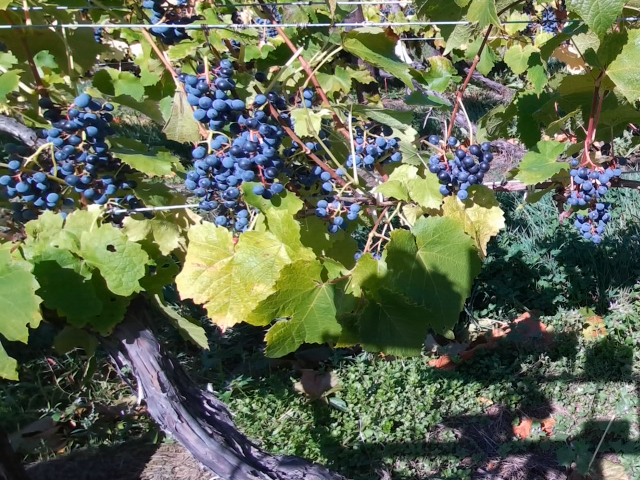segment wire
<instances>
[{
  "label": "wire",
  "mask_w": 640,
  "mask_h": 480,
  "mask_svg": "<svg viewBox=\"0 0 640 480\" xmlns=\"http://www.w3.org/2000/svg\"><path fill=\"white\" fill-rule=\"evenodd\" d=\"M466 21H413V22H359V21H336L324 23H290V24H261V23H164V24H147L135 22H96L91 24H49V23H33V24H13L2 23L0 29H94L98 27H133L144 29H167V28H259V29H292V28H326L338 26H357V27H415V26H466Z\"/></svg>",
  "instance_id": "obj_1"
},
{
  "label": "wire",
  "mask_w": 640,
  "mask_h": 480,
  "mask_svg": "<svg viewBox=\"0 0 640 480\" xmlns=\"http://www.w3.org/2000/svg\"><path fill=\"white\" fill-rule=\"evenodd\" d=\"M188 208L198 209L199 204L186 203V204H181L176 206H139V207H134L129 209H108L107 213L108 214H131V213H136L141 211H178V210H184Z\"/></svg>",
  "instance_id": "obj_2"
},
{
  "label": "wire",
  "mask_w": 640,
  "mask_h": 480,
  "mask_svg": "<svg viewBox=\"0 0 640 480\" xmlns=\"http://www.w3.org/2000/svg\"><path fill=\"white\" fill-rule=\"evenodd\" d=\"M332 196H333L332 192L310 193V194L304 195L303 196V200L307 201V200L312 199V198H327V197H332Z\"/></svg>",
  "instance_id": "obj_3"
}]
</instances>
